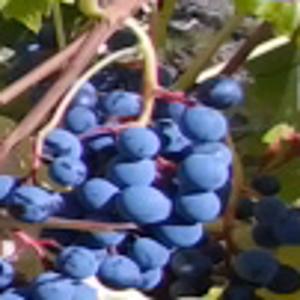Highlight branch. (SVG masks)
<instances>
[{
  "mask_svg": "<svg viewBox=\"0 0 300 300\" xmlns=\"http://www.w3.org/2000/svg\"><path fill=\"white\" fill-rule=\"evenodd\" d=\"M143 0H113L89 31L75 39L61 53L38 65L25 76L0 92V103L7 104L27 92L42 79L63 68L53 85L45 91L35 107L26 110L0 148V165H5L33 127L43 122L73 78L90 62L96 46L106 45L126 22L134 18Z\"/></svg>",
  "mask_w": 300,
  "mask_h": 300,
  "instance_id": "30e6481e",
  "label": "branch"
}]
</instances>
